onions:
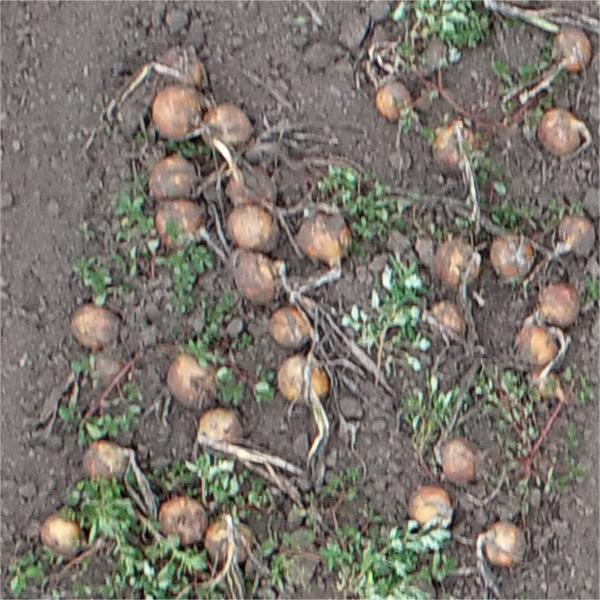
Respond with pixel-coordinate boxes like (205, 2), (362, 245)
(206, 518), (256, 569)
(152, 198), (209, 249)
(490, 233), (533, 276)
(70, 304), (117, 350)
(227, 167), (271, 208)
(552, 25), (591, 71)
(371, 77), (414, 120)
(83, 440), (127, 483)
(159, 46), (204, 91)
(197, 407), (240, 445)
(515, 324), (557, 366)
(409, 484), (450, 527)
(295, 209), (349, 261)
(230, 249), (284, 303)
(480, 521), (521, 566)
(228, 203), (278, 249)
(276, 357), (330, 400)
(436, 437), (479, 483)
(167, 352), (218, 408)
(87, 348), (124, 383)
(427, 300), (465, 338)
(41, 513), (81, 555)
(553, 216), (592, 254)
(148, 84), (206, 141)
(267, 305), (310, 348)
(203, 103), (251, 147)
(538, 108), (586, 155)
(430, 239), (481, 293)
(159, 495), (207, 542)
(536, 282), (577, 326)
(150, 155), (196, 199)
(431, 124), (466, 171)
